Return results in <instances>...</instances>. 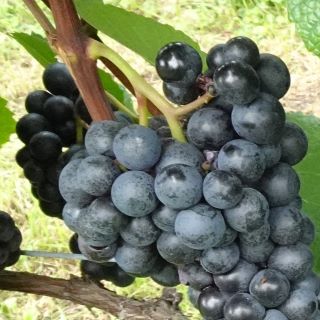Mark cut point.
I'll use <instances>...</instances> for the list:
<instances>
[{
	"mask_svg": "<svg viewBox=\"0 0 320 320\" xmlns=\"http://www.w3.org/2000/svg\"><path fill=\"white\" fill-rule=\"evenodd\" d=\"M86 54L94 61L99 57H106L127 77L133 89L136 92L139 103V124L148 126L151 118L154 116L147 110L146 101L149 99L168 119L173 138L187 143L182 129L188 117L204 104H207L210 98L214 97L206 92L200 98L186 105H177L164 97L151 83H149L140 73H138L127 61H125L116 51L103 44L102 42L89 38Z\"/></svg>",
	"mask_w": 320,
	"mask_h": 320,
	"instance_id": "1",
	"label": "cut point"
}]
</instances>
